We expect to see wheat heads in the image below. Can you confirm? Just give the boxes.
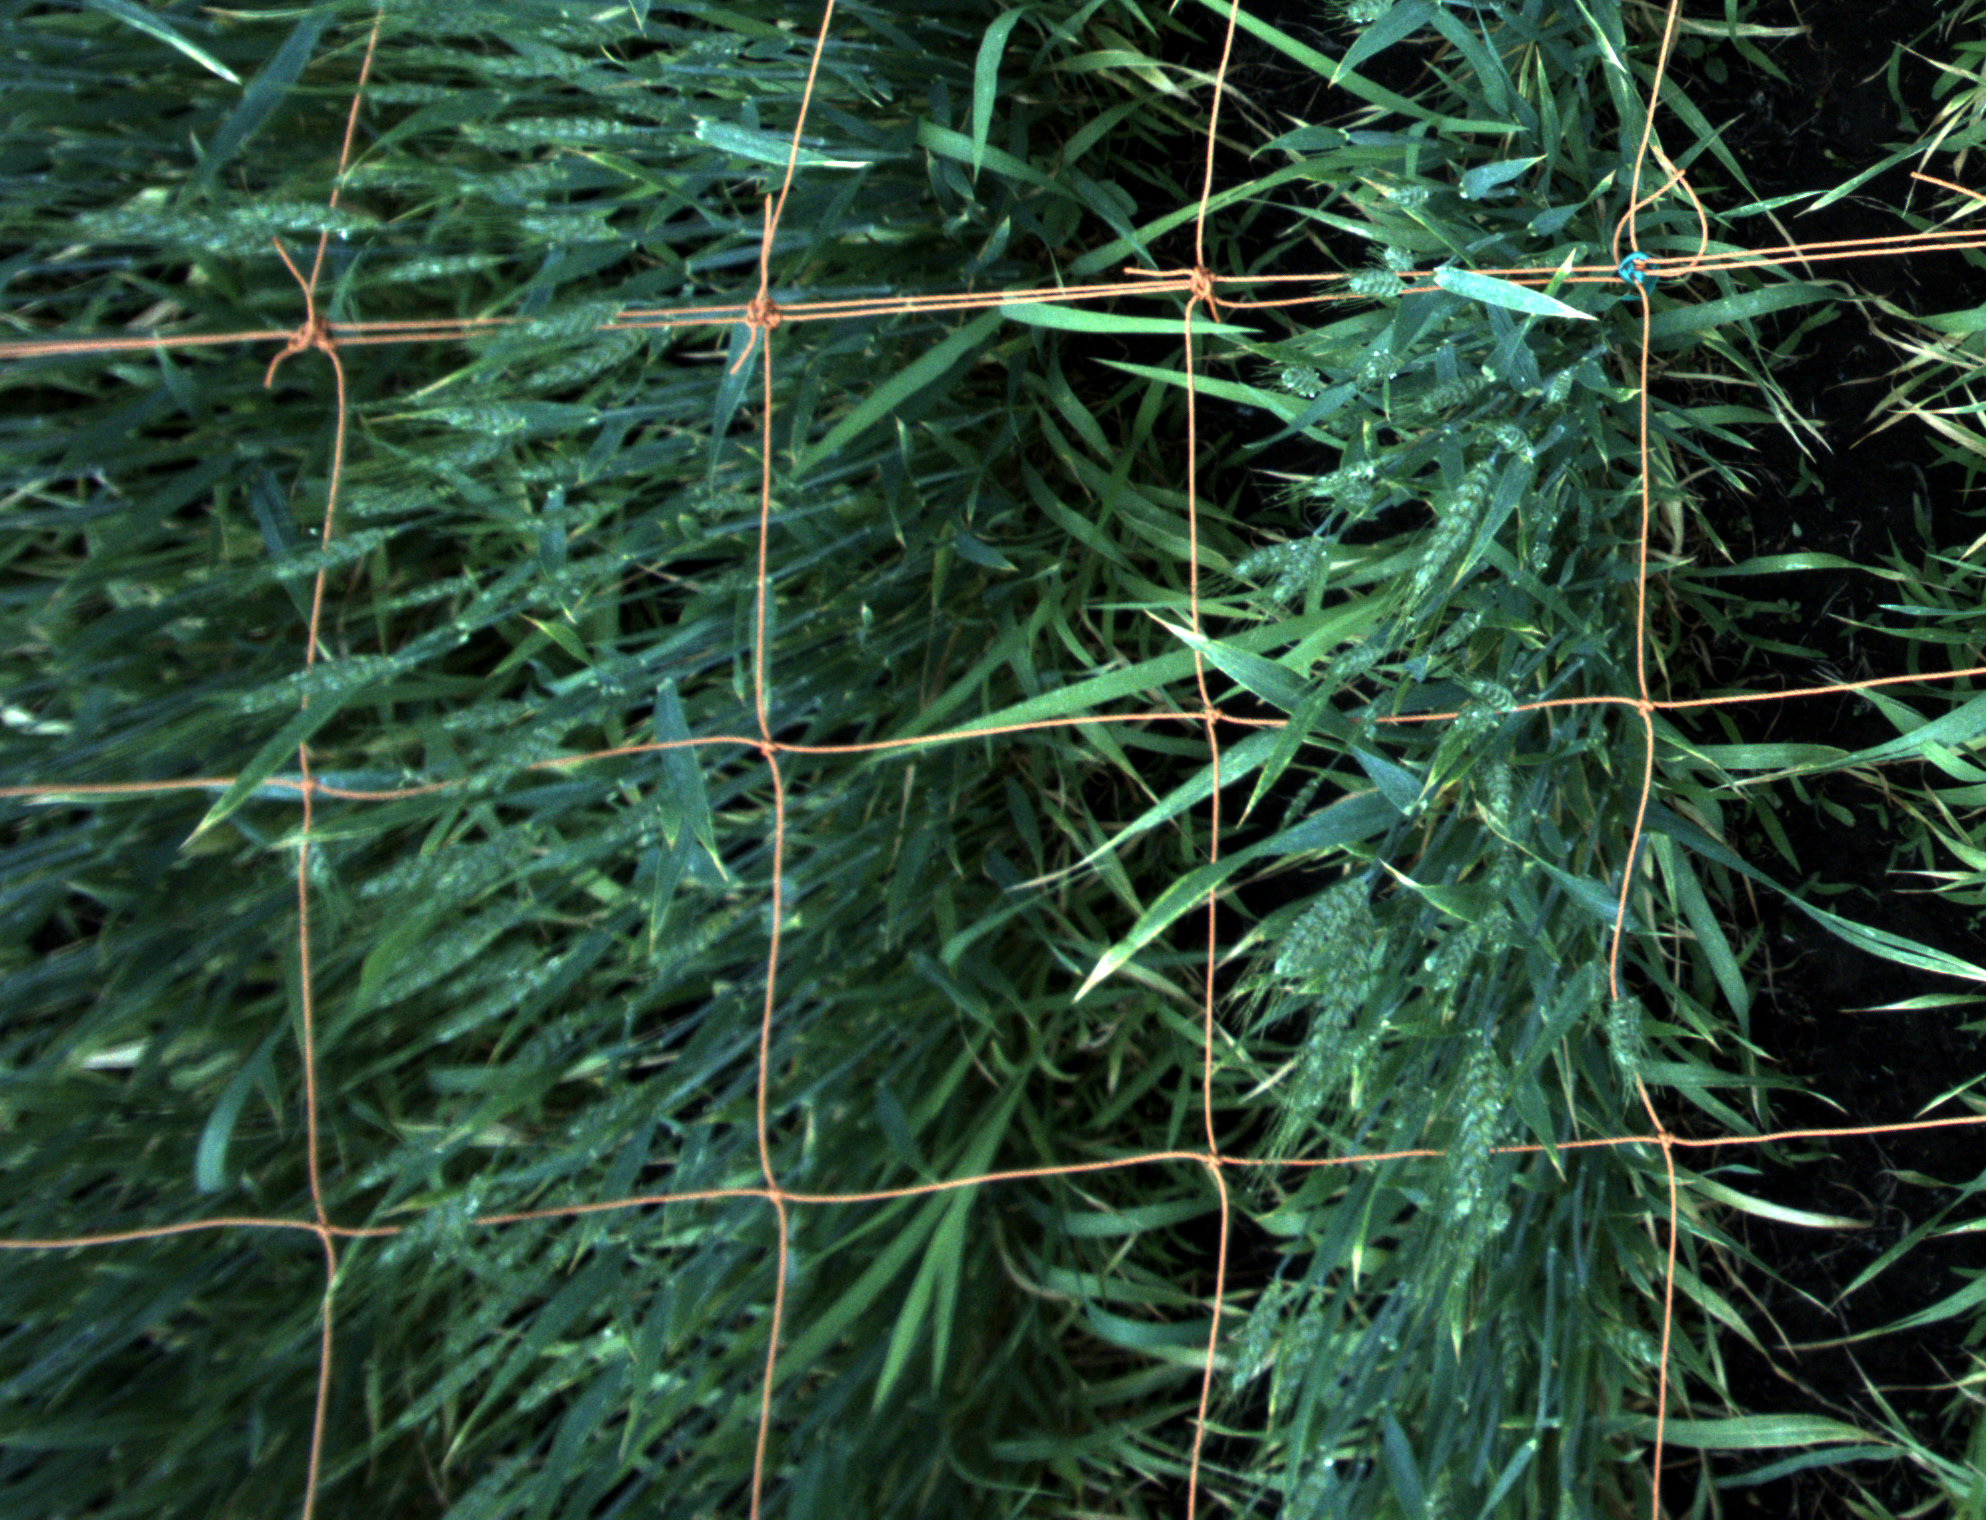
[1327,410,1364,438]
[1574,1282,1592,1349]
[403,44,480,71]
[526,316,662,387]
[613,83,676,125]
[1452,1043,1503,1216]
[447,1456,529,1516]
[689,30,745,55]
[1380,243,1414,274]
[1286,778,1319,824]
[1325,646,1389,684]
[1454,699,1495,740]
[1383,891,1420,968]
[1340,475,1378,510]
[1315,452,1392,491]
[229,201,385,236]
[498,1177,575,1268]
[1600,1313,1662,1366]
[1454,1212,1491,1282]
[399,1342,501,1430]
[337,163,440,189]
[1275,1289,1326,1410]
[245,658,395,714]
[462,160,571,195]
[480,49,592,77]
[1489,845,1516,891]
[1498,1289,1527,1388]
[523,1326,612,1408]
[1363,687,1393,724]
[1275,364,1323,400]
[529,580,565,606]
[390,569,474,613]
[1522,491,1545,523]
[368,80,450,107]
[1419,372,1490,417]
[380,911,506,1003]
[270,523,390,581]
[1473,677,1520,711]
[445,401,535,434]
[1493,421,1536,466]
[1306,906,1378,1080]
[1485,898,1514,955]
[1483,758,1516,822]
[585,1255,670,1320]
[649,900,739,964]
[1310,1017,1389,1114]
[523,297,627,340]
[382,254,504,283]
[1608,999,1641,1072]
[1365,351,1408,382]
[357,840,486,902]
[1557,897,1577,942]
[482,127,541,151]
[399,6,512,36]
[485,1233,576,1331]
[598,679,632,700]
[1583,727,1610,753]
[1399,1209,1431,1265]
[705,571,765,598]
[1349,271,1408,302]
[430,822,534,907]
[1272,535,1325,609]
[439,965,518,1000]
[416,373,510,410]
[1424,1467,1458,1519]
[1544,367,1574,406]
[554,550,628,582]
[537,20,627,47]
[1439,612,1478,653]
[293,839,333,890]
[1226,1282,1282,1391]
[1433,921,1482,990]
[514,209,621,245]
[347,482,452,519]
[81,206,304,257]
[441,715,579,796]
[1384,183,1427,207]
[510,1014,584,1068]
[372,0,475,11]
[373,1185,486,1261]
[243,650,381,701]
[359,1118,472,1187]
[512,497,622,536]
[504,113,627,140]
[567,1075,657,1139]
[1346,0,1396,22]
[1274,869,1375,978]
[1286,1453,1335,1516]
[1416,460,1498,589]
[1231,532,1310,585]
[401,436,506,472]
[437,955,563,1040]
[1396,1056,1429,1116]
[440,699,534,732]
[1533,541,1555,572]
[693,490,761,515]
[612,780,677,832]
[518,462,579,488]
